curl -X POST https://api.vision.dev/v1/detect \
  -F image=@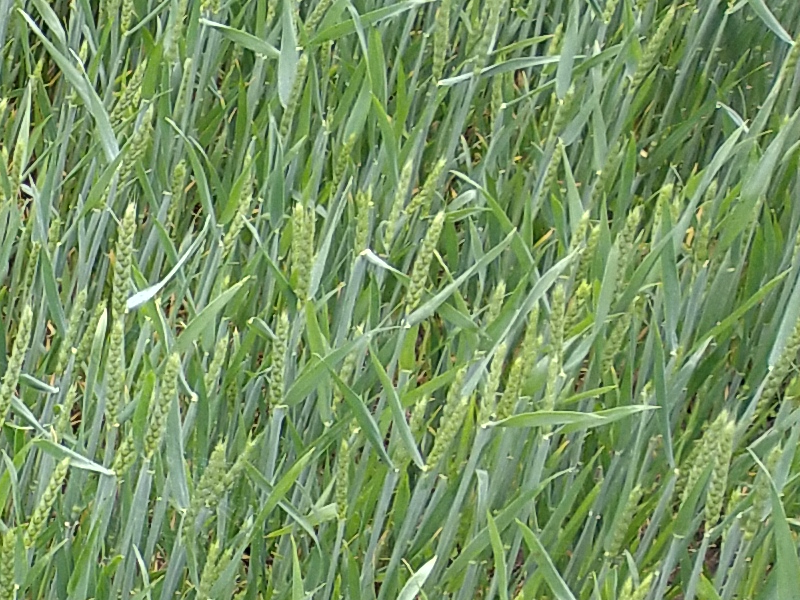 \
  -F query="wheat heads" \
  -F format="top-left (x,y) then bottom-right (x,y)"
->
top-left (552, 284), bottom-right (563, 374)
top-left (30, 57), bottom-right (43, 88)
top-left (226, 377), bottom-right (238, 413)
top-left (518, 355), bottom-right (533, 395)
top-left (438, 365), bottom-right (467, 432)
top-left (608, 485), bottom-right (642, 559)
top-left (104, 323), bottom-right (125, 428)
top-left (333, 439), bottom-right (350, 519)
top-left (458, 504), bottom-right (474, 542)
top-left (631, 297), bottom-right (645, 324)
top-left (23, 456), bottom-right (68, 551)
top-left (167, 161), bottom-right (186, 218)
top-left (142, 353), bottom-right (180, 460)
top-left (167, 0), bottom-right (191, 62)
top-left (240, 153), bottom-right (252, 203)
top-left (590, 144), bottom-right (622, 207)
top-left (574, 224), bottom-right (598, 286)
top-left (474, 0), bottom-right (510, 76)
top-left (631, 2), bottom-right (678, 94)
top-left (522, 307), bottom-right (539, 369)
top-left (333, 327), bottom-right (361, 411)
top-left (0, 530), bottom-right (17, 600)
top-left (619, 573), bottom-right (655, 600)
top-left (785, 34), bottom-right (800, 77)
top-left (77, 38), bottom-right (88, 72)
top-left (728, 0), bottom-right (743, 6)
top-left (75, 304), bottom-right (108, 373)
top-left (492, 57), bottom-right (504, 124)
top-left (404, 211), bottom-right (445, 318)
top-left (723, 487), bottom-right (740, 541)
top-left (432, 0), bottom-right (453, 78)
top-left (673, 430), bottom-right (710, 492)
top-left (747, 448), bottom-right (782, 539)
top-left (12, 139), bottom-right (24, 194)
top-left (426, 398), bottom-right (467, 471)
top-left (651, 182), bottom-right (675, 235)
top-left (291, 201), bottom-right (303, 271)
top-left (486, 282), bottom-right (506, 327)
top-left (24, 243), bottom-right (40, 299)
top-left (406, 189), bottom-right (429, 215)
top-left (685, 411), bottom-right (728, 498)
top-left (549, 22), bottom-right (563, 56)
top-left (24, 217), bottom-right (34, 244)
top-left (48, 217), bottom-right (61, 251)
top-left (536, 140), bottom-right (564, 207)
top-left (111, 201), bottom-right (136, 318)
top-left (206, 444), bottom-right (251, 508)
top-left (296, 203), bottom-right (314, 303)
top-left (497, 358), bottom-right (522, 420)
top-left (213, 0), bottom-right (222, 12)
top-left (752, 314), bottom-right (800, 416)
top-left (120, 0), bottom-right (136, 32)
top-left (618, 577), bottom-right (634, 600)
top-left (332, 133), bottom-right (356, 196)
top-left (609, 206), bottom-right (642, 313)
top-left (381, 156), bottom-right (413, 254)
top-left (178, 437), bottom-right (220, 541)
top-left (687, 0), bottom-right (699, 18)
top-left (111, 0), bottom-right (129, 18)
top-left (109, 58), bottom-right (145, 129)
top-left (703, 423), bottom-right (735, 528)
top-left (222, 12), bottom-right (225, 25)
top-left (479, 341), bottom-right (509, 423)
top-left (699, 179), bottom-right (719, 224)
top-left (563, 284), bottom-right (592, 337)
top-left (321, 40), bottom-right (330, 76)
top-left (741, 208), bottom-right (755, 256)
top-left (191, 541), bottom-right (220, 600)
top-left (549, 81), bottom-right (578, 135)
top-left (694, 220), bottom-right (712, 265)
top-left (408, 396), bottom-right (429, 431)
top-left (221, 203), bottom-right (248, 256)
top-left (0, 306), bottom-right (32, 426)
top-left (305, 0), bottom-right (337, 35)
top-left (423, 156), bottom-right (446, 189)
top-left (102, 108), bottom-right (151, 204)
top-left (267, 0), bottom-right (284, 21)
top-left (603, 0), bottom-right (640, 24)
top-left (602, 314), bottom-right (630, 374)
top-left (269, 312), bottom-right (290, 415)
top-left (479, 0), bottom-right (499, 25)
top-left (352, 184), bottom-right (371, 272)
top-left (466, 17), bottom-right (479, 51)
top-left (202, 335), bottom-right (229, 397)
top-left (55, 288), bottom-right (88, 373)
top-left (571, 210), bottom-right (592, 254)
top-left (279, 55), bottom-right (306, 135)
top-left (543, 357), bottom-right (558, 412)
top-left (669, 199), bottom-right (683, 229)
top-left (52, 388), bottom-right (76, 440)
top-left (688, 0), bottom-right (699, 12)
top-left (111, 425), bottom-right (139, 480)
top-left (177, 60), bottom-right (190, 107)
top-left (673, 346), bottom-right (684, 376)
top-left (212, 547), bottom-right (233, 585)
